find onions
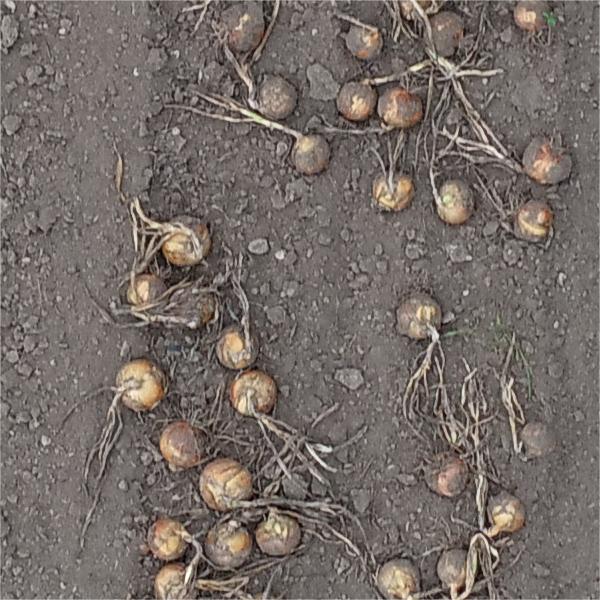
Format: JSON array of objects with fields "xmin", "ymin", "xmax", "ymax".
[
  {"xmin": 487, "ymin": 497, "xmax": 525, "ymax": 531},
  {"xmin": 162, "ymin": 226, "xmax": 205, "ymax": 266},
  {"xmin": 215, "ymin": 329, "xmax": 252, "ymax": 367},
  {"xmin": 377, "ymin": 558, "xmax": 419, "ymax": 597},
  {"xmin": 398, "ymin": 296, "xmax": 437, "ymax": 337},
  {"xmin": 397, "ymin": 0, "xmax": 438, "ymax": 16},
  {"xmin": 127, "ymin": 274, "xmax": 159, "ymax": 305},
  {"xmin": 512, "ymin": 2, "xmax": 539, "ymax": 29},
  {"xmin": 149, "ymin": 516, "xmax": 188, "ymax": 558},
  {"xmin": 523, "ymin": 138, "xmax": 567, "ymax": 182},
  {"xmin": 223, "ymin": 8, "xmax": 263, "ymax": 53},
  {"xmin": 425, "ymin": 13, "xmax": 462, "ymax": 56},
  {"xmin": 157, "ymin": 420, "xmax": 202, "ymax": 466},
  {"xmin": 171, "ymin": 284, "xmax": 212, "ymax": 322},
  {"xmin": 228, "ymin": 372, "xmax": 276, "ymax": 415},
  {"xmin": 371, "ymin": 171, "xmax": 412, "ymax": 209},
  {"xmin": 378, "ymin": 87, "xmax": 421, "ymax": 128},
  {"xmin": 199, "ymin": 459, "xmax": 252, "ymax": 508},
  {"xmin": 349, "ymin": 26, "xmax": 382, "ymax": 57},
  {"xmin": 254, "ymin": 76, "xmax": 295, "ymax": 119},
  {"xmin": 520, "ymin": 420, "xmax": 555, "ymax": 458},
  {"xmin": 432, "ymin": 177, "xmax": 472, "ymax": 222},
  {"xmin": 428, "ymin": 455, "xmax": 467, "ymax": 496},
  {"xmin": 435, "ymin": 548, "xmax": 470, "ymax": 586},
  {"xmin": 153, "ymin": 561, "xmax": 191, "ymax": 596},
  {"xmin": 337, "ymin": 79, "xmax": 375, "ymax": 119},
  {"xmin": 513, "ymin": 199, "xmax": 550, "ymax": 240},
  {"xmin": 289, "ymin": 133, "xmax": 327, "ymax": 174},
  {"xmin": 254, "ymin": 513, "xmax": 298, "ymax": 555},
  {"xmin": 116, "ymin": 359, "xmax": 164, "ymax": 408},
  {"xmin": 207, "ymin": 519, "xmax": 250, "ymax": 562}
]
